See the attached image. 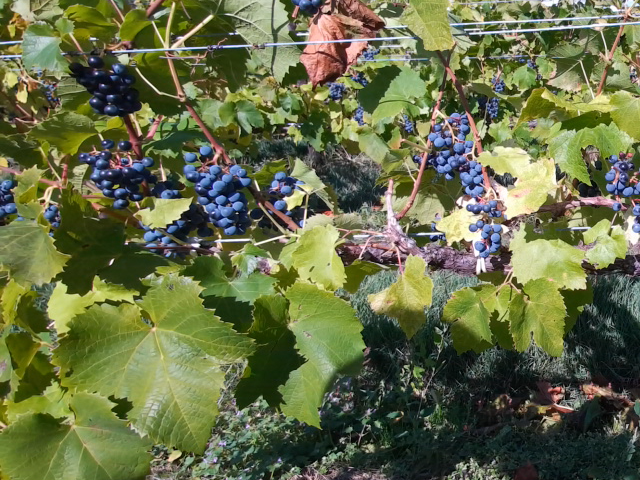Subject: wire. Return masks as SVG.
<instances>
[{
  "label": "wire",
  "mask_w": 640,
  "mask_h": 480,
  "mask_svg": "<svg viewBox=\"0 0 640 480\" xmlns=\"http://www.w3.org/2000/svg\"><path fill=\"white\" fill-rule=\"evenodd\" d=\"M417 35H400V36H379V37H360V38H337L330 40H288V41H266L259 43L247 44H224V45H206L192 47H147V48H129V49H92L81 50L76 52H59L60 57H78L83 55L94 54H131V53H150V52H194L208 50H233V49H249L261 48L269 46H290V45H332L339 43H362V42H381V41H403L417 40Z\"/></svg>",
  "instance_id": "wire-1"
},
{
  "label": "wire",
  "mask_w": 640,
  "mask_h": 480,
  "mask_svg": "<svg viewBox=\"0 0 640 480\" xmlns=\"http://www.w3.org/2000/svg\"><path fill=\"white\" fill-rule=\"evenodd\" d=\"M633 26H640V21H630L626 23H604V24H582L575 26H552V27H539V28H516V29H483L477 31L459 32L454 33V38L479 36L485 34H519V33H541V32H555V31H577L584 29H606V28H628Z\"/></svg>",
  "instance_id": "wire-2"
},
{
  "label": "wire",
  "mask_w": 640,
  "mask_h": 480,
  "mask_svg": "<svg viewBox=\"0 0 640 480\" xmlns=\"http://www.w3.org/2000/svg\"><path fill=\"white\" fill-rule=\"evenodd\" d=\"M623 15H612V16H602V17H594V16H583V15H570L563 17H555V18H540V19H503V20H479V21H461V22H451V27H463V26H481V25H505V24H543V23H557V22H566L573 20L580 21H592V22H605V21H615V20H623Z\"/></svg>",
  "instance_id": "wire-3"
},
{
  "label": "wire",
  "mask_w": 640,
  "mask_h": 480,
  "mask_svg": "<svg viewBox=\"0 0 640 480\" xmlns=\"http://www.w3.org/2000/svg\"><path fill=\"white\" fill-rule=\"evenodd\" d=\"M228 243V244H245L252 243V238H242V237H221L215 239H190V244H217V243Z\"/></svg>",
  "instance_id": "wire-4"
}]
</instances>
